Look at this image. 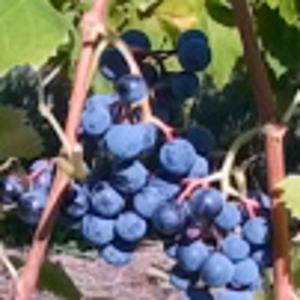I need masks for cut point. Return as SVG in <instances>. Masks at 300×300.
Masks as SVG:
<instances>
[{
    "mask_svg": "<svg viewBox=\"0 0 300 300\" xmlns=\"http://www.w3.org/2000/svg\"><path fill=\"white\" fill-rule=\"evenodd\" d=\"M104 33L117 48L118 52L124 57L126 64L133 75L140 73V66L137 64L134 54L127 47L122 37L107 23L102 22L98 30Z\"/></svg>",
    "mask_w": 300,
    "mask_h": 300,
    "instance_id": "cut-point-2",
    "label": "cut point"
},
{
    "mask_svg": "<svg viewBox=\"0 0 300 300\" xmlns=\"http://www.w3.org/2000/svg\"><path fill=\"white\" fill-rule=\"evenodd\" d=\"M262 134V126H256L239 136L229 150L228 156L224 161L222 171L214 174H207L205 176V181L207 183L220 182V189L226 196H230L238 201H245L247 199V194L245 192L239 191L234 187H230V176L242 147Z\"/></svg>",
    "mask_w": 300,
    "mask_h": 300,
    "instance_id": "cut-point-1",
    "label": "cut point"
}]
</instances>
